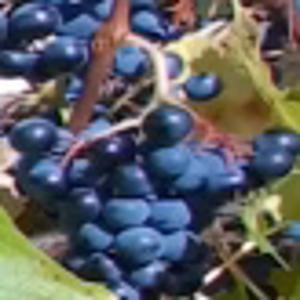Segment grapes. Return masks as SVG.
Instances as JSON below:
<instances>
[{
    "instance_id": "grapes-1",
    "label": "grapes",
    "mask_w": 300,
    "mask_h": 300,
    "mask_svg": "<svg viewBox=\"0 0 300 300\" xmlns=\"http://www.w3.org/2000/svg\"><path fill=\"white\" fill-rule=\"evenodd\" d=\"M80 133L27 116L8 129L17 181L35 201L76 202L80 215L64 265L85 282L108 279L119 300L192 297L214 259L203 234L214 211L282 181L300 156V135L190 136L191 107L178 98L141 112L97 105Z\"/></svg>"
},
{
    "instance_id": "grapes-2",
    "label": "grapes",
    "mask_w": 300,
    "mask_h": 300,
    "mask_svg": "<svg viewBox=\"0 0 300 300\" xmlns=\"http://www.w3.org/2000/svg\"><path fill=\"white\" fill-rule=\"evenodd\" d=\"M116 0H0V75L41 83L66 77L75 104L92 68L91 42Z\"/></svg>"
},
{
    "instance_id": "grapes-3",
    "label": "grapes",
    "mask_w": 300,
    "mask_h": 300,
    "mask_svg": "<svg viewBox=\"0 0 300 300\" xmlns=\"http://www.w3.org/2000/svg\"><path fill=\"white\" fill-rule=\"evenodd\" d=\"M130 9L129 29L155 45H169L188 32L183 19H171L155 0H131Z\"/></svg>"
},
{
    "instance_id": "grapes-4",
    "label": "grapes",
    "mask_w": 300,
    "mask_h": 300,
    "mask_svg": "<svg viewBox=\"0 0 300 300\" xmlns=\"http://www.w3.org/2000/svg\"><path fill=\"white\" fill-rule=\"evenodd\" d=\"M150 68V56L132 44H121L113 51L112 70L121 79L143 77Z\"/></svg>"
},
{
    "instance_id": "grapes-5",
    "label": "grapes",
    "mask_w": 300,
    "mask_h": 300,
    "mask_svg": "<svg viewBox=\"0 0 300 300\" xmlns=\"http://www.w3.org/2000/svg\"><path fill=\"white\" fill-rule=\"evenodd\" d=\"M223 88V80L210 71H201L185 83L186 96L195 102H208L214 99Z\"/></svg>"
},
{
    "instance_id": "grapes-6",
    "label": "grapes",
    "mask_w": 300,
    "mask_h": 300,
    "mask_svg": "<svg viewBox=\"0 0 300 300\" xmlns=\"http://www.w3.org/2000/svg\"><path fill=\"white\" fill-rule=\"evenodd\" d=\"M167 66V74L172 79H178L182 75L183 64L179 55L174 52L164 54Z\"/></svg>"
}]
</instances>
